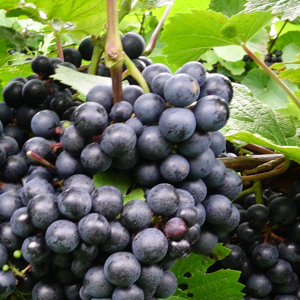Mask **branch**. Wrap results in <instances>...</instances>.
Wrapping results in <instances>:
<instances>
[{"label": "branch", "instance_id": "1", "mask_svg": "<svg viewBox=\"0 0 300 300\" xmlns=\"http://www.w3.org/2000/svg\"><path fill=\"white\" fill-rule=\"evenodd\" d=\"M107 29L102 63L110 69L114 103L121 100L123 46L118 34L117 0H107Z\"/></svg>", "mask_w": 300, "mask_h": 300}, {"label": "branch", "instance_id": "2", "mask_svg": "<svg viewBox=\"0 0 300 300\" xmlns=\"http://www.w3.org/2000/svg\"><path fill=\"white\" fill-rule=\"evenodd\" d=\"M226 167L236 172L265 171L279 167L285 162L283 155L218 157Z\"/></svg>", "mask_w": 300, "mask_h": 300}]
</instances>
